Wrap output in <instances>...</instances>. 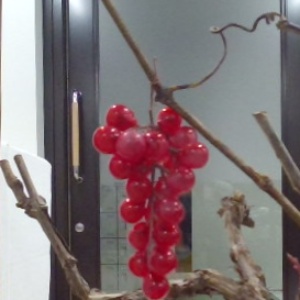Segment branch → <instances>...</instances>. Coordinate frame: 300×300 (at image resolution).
I'll use <instances>...</instances> for the list:
<instances>
[{
	"label": "branch",
	"mask_w": 300,
	"mask_h": 300,
	"mask_svg": "<svg viewBox=\"0 0 300 300\" xmlns=\"http://www.w3.org/2000/svg\"><path fill=\"white\" fill-rule=\"evenodd\" d=\"M103 7L106 9L107 13L111 16L113 21L118 27V30L124 40L128 43V46L130 47L131 51L133 52L134 56L136 57L137 61L141 65V67L144 69L148 79L151 83H153V87L156 91V96L154 97L155 102L162 103L166 106L171 107L175 112L179 113L184 120L189 123L194 129H196L202 137H204L207 141L210 142L212 146H214L216 149H218L231 163L237 167L240 168L242 172L248 178H250L257 187L264 191L266 195H268L270 198L274 199L277 203H279L281 206H283L298 222H300V211L298 208L288 199H286L283 194H281L273 185L272 178L269 176H263L258 173H256L253 169H251L243 159H239L238 157L234 156L233 153L230 151L229 147L227 145H224L220 142L215 136L208 132L203 125H199L197 122V119H195L192 115H190L188 112H186L182 107L179 105V103L173 98V92H176L181 89H188V88H195L200 86L201 84L205 83L208 79L214 76L218 72V70L221 68V65L224 63L225 59L228 56L227 53V39L224 35L223 31L227 30L231 26H236L237 28H240L244 31H247L249 33H252L256 30V25L265 18L266 24H271L275 17H281V14L277 13L276 11H266L263 12L254 22L253 27L247 28L243 25H240L239 23H228L224 27L216 30V28L212 29V33L214 34H220L224 41V55L219 61L216 68L211 71L209 75H207L205 78H203L201 81L192 84V85H178L173 88H165V86L162 84V81L160 77L153 72V70L150 68L148 63L146 62L144 56L142 55L139 47L135 44L134 40L132 39L126 23L118 16V13L116 9L113 7L112 3L109 0H101ZM275 27L277 30L284 32L288 30H292L296 33H300V27L296 24H293L290 20L286 19L285 17H281L278 22H275Z\"/></svg>",
	"instance_id": "obj_1"
},
{
	"label": "branch",
	"mask_w": 300,
	"mask_h": 300,
	"mask_svg": "<svg viewBox=\"0 0 300 300\" xmlns=\"http://www.w3.org/2000/svg\"><path fill=\"white\" fill-rule=\"evenodd\" d=\"M251 205L244 204V195L236 194L233 197L226 196L221 200V207L218 210L220 219L225 217V225H230L232 248L230 250L231 259L238 263L237 271L240 272L242 282H235L230 278L216 276L209 270L195 269L193 277L186 285L172 284L167 294L166 300H176L177 296L186 294L193 296L204 294L213 297V292L223 296V299L232 300L228 294L242 299L254 300H275L266 288L267 281L264 275L258 277L256 273L263 271V266L254 264L246 255L251 251L244 247L242 243L243 235L241 226L255 228V222L250 217Z\"/></svg>",
	"instance_id": "obj_2"
},
{
	"label": "branch",
	"mask_w": 300,
	"mask_h": 300,
	"mask_svg": "<svg viewBox=\"0 0 300 300\" xmlns=\"http://www.w3.org/2000/svg\"><path fill=\"white\" fill-rule=\"evenodd\" d=\"M22 181L16 177L8 159H0V167L6 182V186L13 191L16 197V208L24 210V215L33 218L41 225L52 248L61 261L62 269L65 271L68 284L70 286V300L74 296H79L82 300H102L115 299L121 297V300H149V296L143 293V285L131 292L122 293L100 292L97 288H90V285L81 277L77 269V258L72 256L65 248L61 238L56 234L55 227L47 215L38 207L46 206L45 198L38 195L35 190L31 176L25 166L24 160L20 154L13 156Z\"/></svg>",
	"instance_id": "obj_3"
}]
</instances>
